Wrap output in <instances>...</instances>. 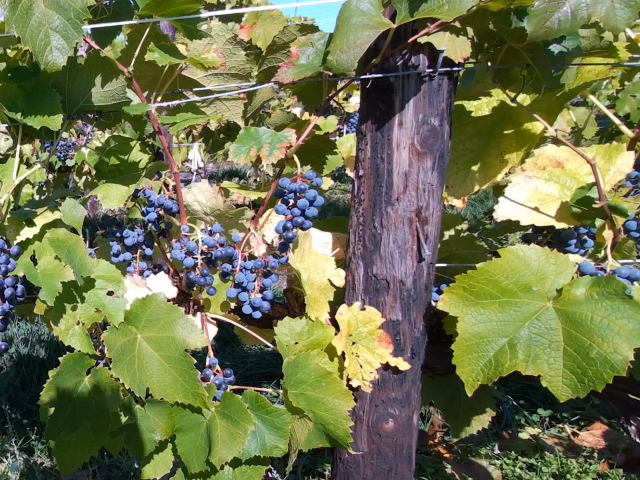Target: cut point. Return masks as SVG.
<instances>
[{
    "label": "cut point",
    "instance_id": "1",
    "mask_svg": "<svg viewBox=\"0 0 640 480\" xmlns=\"http://www.w3.org/2000/svg\"><path fill=\"white\" fill-rule=\"evenodd\" d=\"M252 236H254V238H255L257 247L258 248L262 247L260 235L255 229H253L252 231H249L246 234L245 239L241 243V247L242 248H245L247 246V244L250 242V239H251Z\"/></svg>",
    "mask_w": 640,
    "mask_h": 480
},
{
    "label": "cut point",
    "instance_id": "2",
    "mask_svg": "<svg viewBox=\"0 0 640 480\" xmlns=\"http://www.w3.org/2000/svg\"><path fill=\"white\" fill-rule=\"evenodd\" d=\"M291 158L294 160V162H295V164H296V170H297V173H298V174H301V173H302V168H301V161H300V159L298 158V156H297L295 153H293V155L291 156Z\"/></svg>",
    "mask_w": 640,
    "mask_h": 480
}]
</instances>
